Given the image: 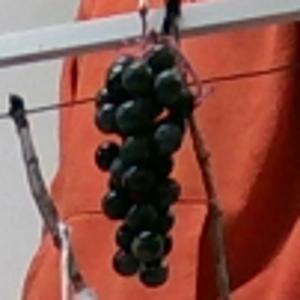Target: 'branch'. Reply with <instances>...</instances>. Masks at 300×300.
Here are the masks:
<instances>
[{"mask_svg": "<svg viewBox=\"0 0 300 300\" xmlns=\"http://www.w3.org/2000/svg\"><path fill=\"white\" fill-rule=\"evenodd\" d=\"M24 108V97L8 91V116L13 120L15 134L20 141L21 160L26 170V183L30 196L38 209V215L49 230L53 248L59 252L62 273L72 290L74 300H99V297L88 287L81 273L67 235V227L61 220L52 195L48 192L30 133V120Z\"/></svg>", "mask_w": 300, "mask_h": 300, "instance_id": "1", "label": "branch"}, {"mask_svg": "<svg viewBox=\"0 0 300 300\" xmlns=\"http://www.w3.org/2000/svg\"><path fill=\"white\" fill-rule=\"evenodd\" d=\"M190 121L189 135L192 140V151L201 170L202 186L213 219V245L217 281L219 283L220 299L230 300L229 297V277L226 269V255L224 252V239L221 217L217 206V196L213 172L206 152L204 143L200 137L197 127L196 110L187 116Z\"/></svg>", "mask_w": 300, "mask_h": 300, "instance_id": "2", "label": "branch"}, {"mask_svg": "<svg viewBox=\"0 0 300 300\" xmlns=\"http://www.w3.org/2000/svg\"><path fill=\"white\" fill-rule=\"evenodd\" d=\"M163 20L159 28V43L179 51V29L182 21V0H163Z\"/></svg>", "mask_w": 300, "mask_h": 300, "instance_id": "3", "label": "branch"}]
</instances>
